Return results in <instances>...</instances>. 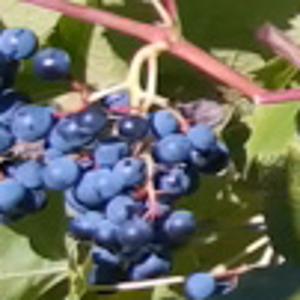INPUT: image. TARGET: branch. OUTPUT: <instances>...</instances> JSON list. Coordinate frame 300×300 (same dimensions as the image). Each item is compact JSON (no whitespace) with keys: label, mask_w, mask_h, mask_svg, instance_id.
<instances>
[{"label":"branch","mask_w":300,"mask_h":300,"mask_svg":"<svg viewBox=\"0 0 300 300\" xmlns=\"http://www.w3.org/2000/svg\"><path fill=\"white\" fill-rule=\"evenodd\" d=\"M30 3L35 8L131 32L146 43L172 51L189 66L243 92L254 103L300 104V89L260 88L254 80L224 66L211 50L186 41L185 36L174 29L69 0H30Z\"/></svg>","instance_id":"30e6481e"}]
</instances>
